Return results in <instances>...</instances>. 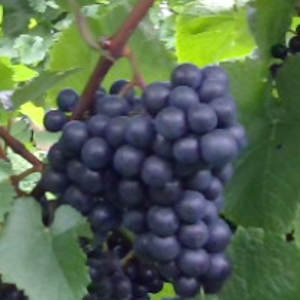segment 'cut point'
<instances>
[{
    "label": "cut point",
    "mask_w": 300,
    "mask_h": 300,
    "mask_svg": "<svg viewBox=\"0 0 300 300\" xmlns=\"http://www.w3.org/2000/svg\"><path fill=\"white\" fill-rule=\"evenodd\" d=\"M123 53L127 56L128 61H129L130 65H131V68H132V71H133V75L135 77V79L133 80V83H135V84H142L143 83V78L138 73V68H137L135 60L133 59L132 53L128 49H124Z\"/></svg>",
    "instance_id": "cut-point-1"
}]
</instances>
